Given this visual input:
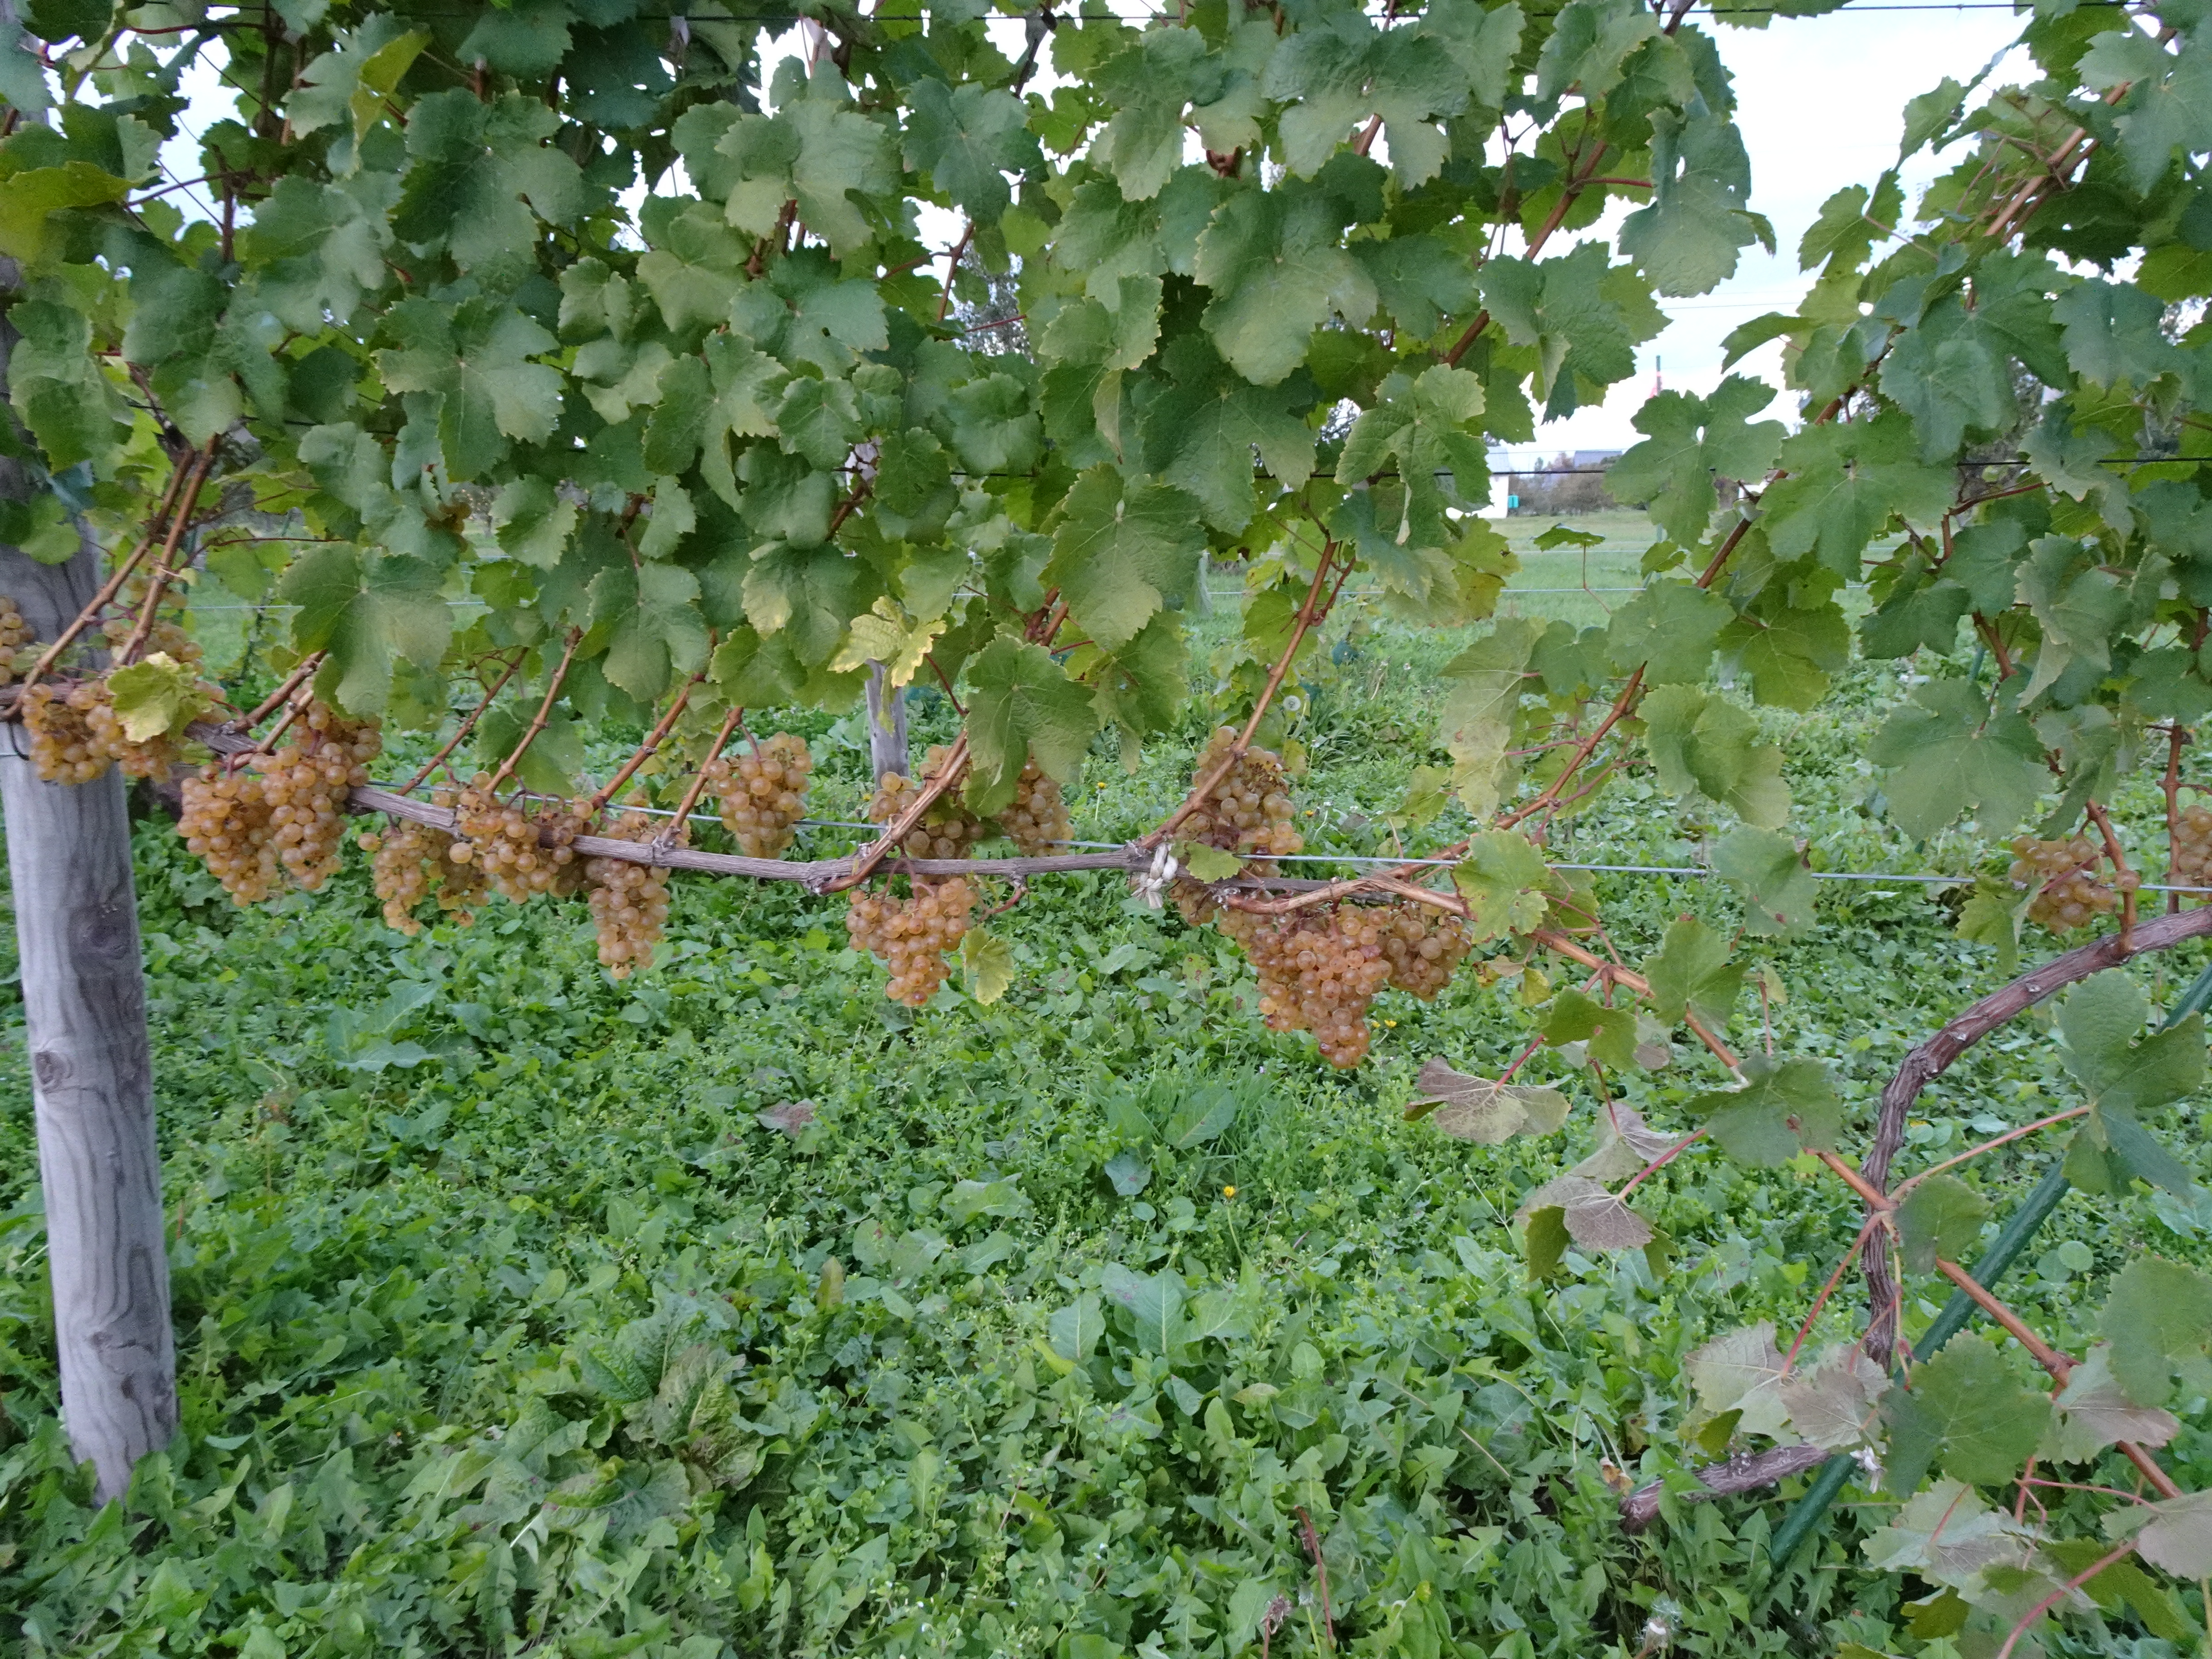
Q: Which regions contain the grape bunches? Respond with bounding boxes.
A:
[20,680,112,785]
[1357,900,1470,1002]
[252,743,369,892]
[1148,789,1280,921]
[842,887,907,959]
[1192,726,1305,855]
[73,660,185,785]
[994,738,1076,857]
[2008,832,2140,934]
[286,652,382,765]
[357,817,434,939]
[584,811,688,981]
[703,731,814,860]
[882,881,977,1007]
[0,593,42,686]
[123,545,189,608]
[903,743,989,882]
[1286,903,1383,1070]
[428,771,593,905]
[102,617,230,728]
[176,763,275,909]
[1217,891,1329,1034]
[861,769,916,825]
[2167,805,2212,903]
[432,825,496,927]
